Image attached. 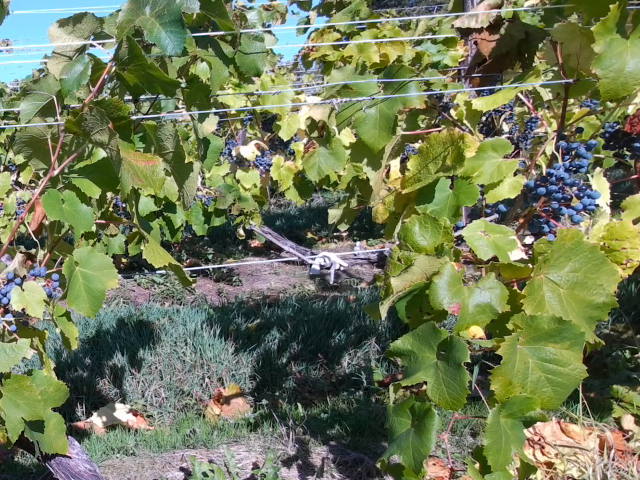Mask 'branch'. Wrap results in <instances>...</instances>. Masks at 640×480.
<instances>
[{"mask_svg": "<svg viewBox=\"0 0 640 480\" xmlns=\"http://www.w3.org/2000/svg\"><path fill=\"white\" fill-rule=\"evenodd\" d=\"M571 87V83H566L565 84V88L563 90V100H562V104L560 106L561 109V116H560V121H559V128H558V133L556 132H552L547 138L546 140L543 142V144L539 147V149L537 150V152L535 153L534 157H533V161L531 162L530 168H529V172L533 173L536 167V164L538 163V159L541 156L542 152L545 150V148L549 145V143L554 139V137H556L557 141H560L562 139L563 136V130H564V123H565V119H566V106H567V102H568V93Z\"/></svg>", "mask_w": 640, "mask_h": 480, "instance_id": "obj_2", "label": "branch"}, {"mask_svg": "<svg viewBox=\"0 0 640 480\" xmlns=\"http://www.w3.org/2000/svg\"><path fill=\"white\" fill-rule=\"evenodd\" d=\"M550 44L554 50L555 56H556V60H557V64H558V68L560 71V75L562 78H567V74L565 72L564 66H563V62H562V58H561V54L559 51V48L557 46V43L555 40H551Z\"/></svg>", "mask_w": 640, "mask_h": 480, "instance_id": "obj_5", "label": "branch"}, {"mask_svg": "<svg viewBox=\"0 0 640 480\" xmlns=\"http://www.w3.org/2000/svg\"><path fill=\"white\" fill-rule=\"evenodd\" d=\"M113 66V62L109 61L107 63V65L105 66L101 76L98 78V80L96 81V83L94 84V86L91 88L90 92L87 94V96L84 98V102L88 103L89 100L94 96L95 92L99 89L101 83L103 82V80L106 79L107 74L109 73L110 69Z\"/></svg>", "mask_w": 640, "mask_h": 480, "instance_id": "obj_3", "label": "branch"}, {"mask_svg": "<svg viewBox=\"0 0 640 480\" xmlns=\"http://www.w3.org/2000/svg\"><path fill=\"white\" fill-rule=\"evenodd\" d=\"M554 151H555V152H552V153H551V156H550V157L548 158V160H547V163H546V167H547V168H550V167H551V165H552L553 161L555 160V158H556V156H557V153H556V152H558V151H559V148H558V147H555V148H554Z\"/></svg>", "mask_w": 640, "mask_h": 480, "instance_id": "obj_6", "label": "branch"}, {"mask_svg": "<svg viewBox=\"0 0 640 480\" xmlns=\"http://www.w3.org/2000/svg\"><path fill=\"white\" fill-rule=\"evenodd\" d=\"M66 133H67V128L63 127L62 130L59 133L58 141H57V144H56V147L54 149L53 156H52V161H51V164L49 165V167L47 169V174L44 176L41 184L39 185V187L36 190V192L33 194L32 198L30 199L28 204L22 210V212L20 214V217L16 221V225L8 233V235H7L6 239H5V242H4V244H3V246L1 247V250H0V258L4 257V254H5L6 250L8 249V246L10 244L11 239L13 238L14 234L19 230V228L21 227V224H22V222L24 220V217L26 216V214L28 213L30 208L35 204L37 198L40 196V194L42 193L43 189L46 187L48 180L51 179L52 172H53V170H54V168L56 166L57 158H58V155H59V151L61 149V146H62V143H63V139H64V136H65Z\"/></svg>", "mask_w": 640, "mask_h": 480, "instance_id": "obj_1", "label": "branch"}, {"mask_svg": "<svg viewBox=\"0 0 640 480\" xmlns=\"http://www.w3.org/2000/svg\"><path fill=\"white\" fill-rule=\"evenodd\" d=\"M70 231L69 227H65L64 230L60 233V235L58 236L57 240L55 241L54 245L52 246V248L43 256V258L40 261V266L44 267L48 258H50L55 251L57 250V248L59 247L60 243L63 241V238L67 235V233Z\"/></svg>", "mask_w": 640, "mask_h": 480, "instance_id": "obj_4", "label": "branch"}]
</instances>
